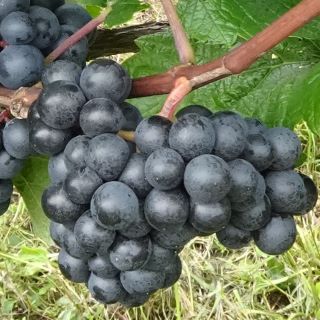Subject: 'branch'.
Masks as SVG:
<instances>
[{
	"instance_id": "30e6481e",
	"label": "branch",
	"mask_w": 320,
	"mask_h": 320,
	"mask_svg": "<svg viewBox=\"0 0 320 320\" xmlns=\"http://www.w3.org/2000/svg\"><path fill=\"white\" fill-rule=\"evenodd\" d=\"M175 37L181 63L168 71L133 78L129 98L169 94L184 81L192 90L246 70L258 55L272 49L320 14V0H301L252 38L214 61L196 66L192 41L171 0H162Z\"/></svg>"
},
{
	"instance_id": "325d2c04",
	"label": "branch",
	"mask_w": 320,
	"mask_h": 320,
	"mask_svg": "<svg viewBox=\"0 0 320 320\" xmlns=\"http://www.w3.org/2000/svg\"><path fill=\"white\" fill-rule=\"evenodd\" d=\"M42 89L41 81L31 87H22L15 90L0 87V108L10 109L12 116L15 118H28V109L31 103L38 99Z\"/></svg>"
},
{
	"instance_id": "170604dd",
	"label": "branch",
	"mask_w": 320,
	"mask_h": 320,
	"mask_svg": "<svg viewBox=\"0 0 320 320\" xmlns=\"http://www.w3.org/2000/svg\"><path fill=\"white\" fill-rule=\"evenodd\" d=\"M115 3V0H111L107 3V7L95 18L91 19L85 26L75 32L73 35L64 40L53 52H51L45 58V66L52 63L62 52L68 47L78 41L80 38L95 29L103 20L106 19L109 12L111 11V5Z\"/></svg>"
}]
</instances>
